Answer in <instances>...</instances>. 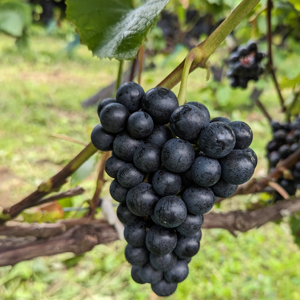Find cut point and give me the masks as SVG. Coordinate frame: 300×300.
Masks as SVG:
<instances>
[{"label":"cut point","mask_w":300,"mask_h":300,"mask_svg":"<svg viewBox=\"0 0 300 300\" xmlns=\"http://www.w3.org/2000/svg\"><path fill=\"white\" fill-rule=\"evenodd\" d=\"M198 51H199L198 47H193L189 50V52L185 56L182 81L180 83V87L177 95L179 105H183L187 103V80L189 75V69Z\"/></svg>","instance_id":"6a23745f"}]
</instances>
